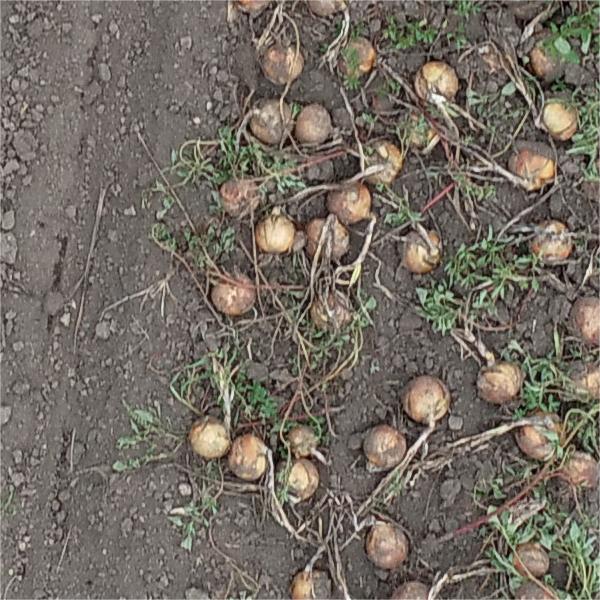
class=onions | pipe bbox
[226,434,266,477]
[399,118,431,148]
[560,453,594,489]
[570,297,599,344]
[400,230,439,271]
[363,139,402,181]
[259,43,301,83]
[516,542,548,577]
[227,0,264,19]
[515,416,558,460]
[508,0,550,16]
[280,460,320,499]
[361,424,403,467]
[363,519,410,567]
[512,579,561,600]
[210,270,253,314]
[307,0,343,13]
[565,362,599,397]
[402,377,448,422]
[307,220,347,258]
[415,61,457,102]
[339,39,377,78]
[524,43,559,81]
[583,159,600,201]
[188,415,228,456]
[287,569,330,600]
[478,361,520,403]
[539,99,577,138]
[328,181,371,223]
[313,291,349,329]
[531,220,570,261]
[284,422,317,456]
[254,213,294,252]
[466,43,510,79]
[392,579,429,599]
[511,145,554,188]
[219,174,261,215]
[248,99,290,142]
[294,104,330,143]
